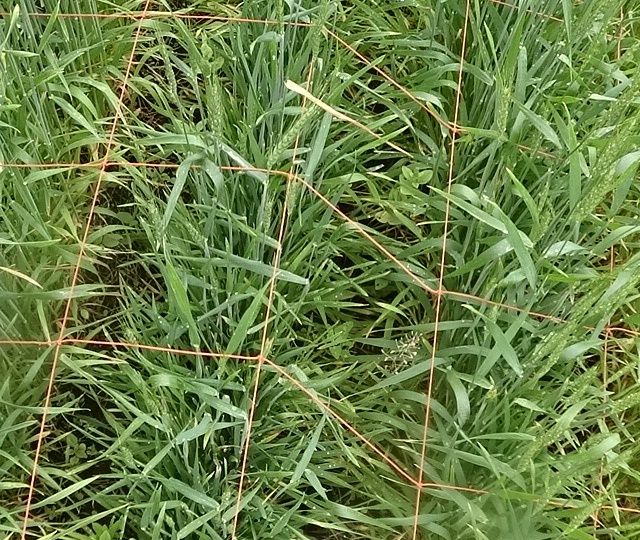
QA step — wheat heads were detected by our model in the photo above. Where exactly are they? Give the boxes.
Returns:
[532,208,551,245]
[147,195,163,238]
[520,441,539,469]
[571,370,600,388]
[219,489,233,511]
[125,330,139,353]
[269,106,315,162]
[141,394,160,415]
[611,37,639,75]
[568,278,606,311]
[121,444,134,469]
[262,200,271,227]
[602,87,631,125]
[311,25,321,59]
[585,19,609,62]
[286,178,301,215]
[562,499,601,532]
[603,358,635,388]
[277,0,283,34]
[158,46,177,91]
[599,447,630,476]
[205,81,222,143]
[610,392,640,414]
[596,1,617,14]
[537,321,571,356]
[486,304,500,339]
[588,125,629,184]
[538,429,561,450]
[179,217,208,247]
[528,112,550,156]
[533,183,550,217]
[212,278,218,298]
[549,338,571,374]
[576,167,614,220]
[497,84,511,136]
[535,484,559,511]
